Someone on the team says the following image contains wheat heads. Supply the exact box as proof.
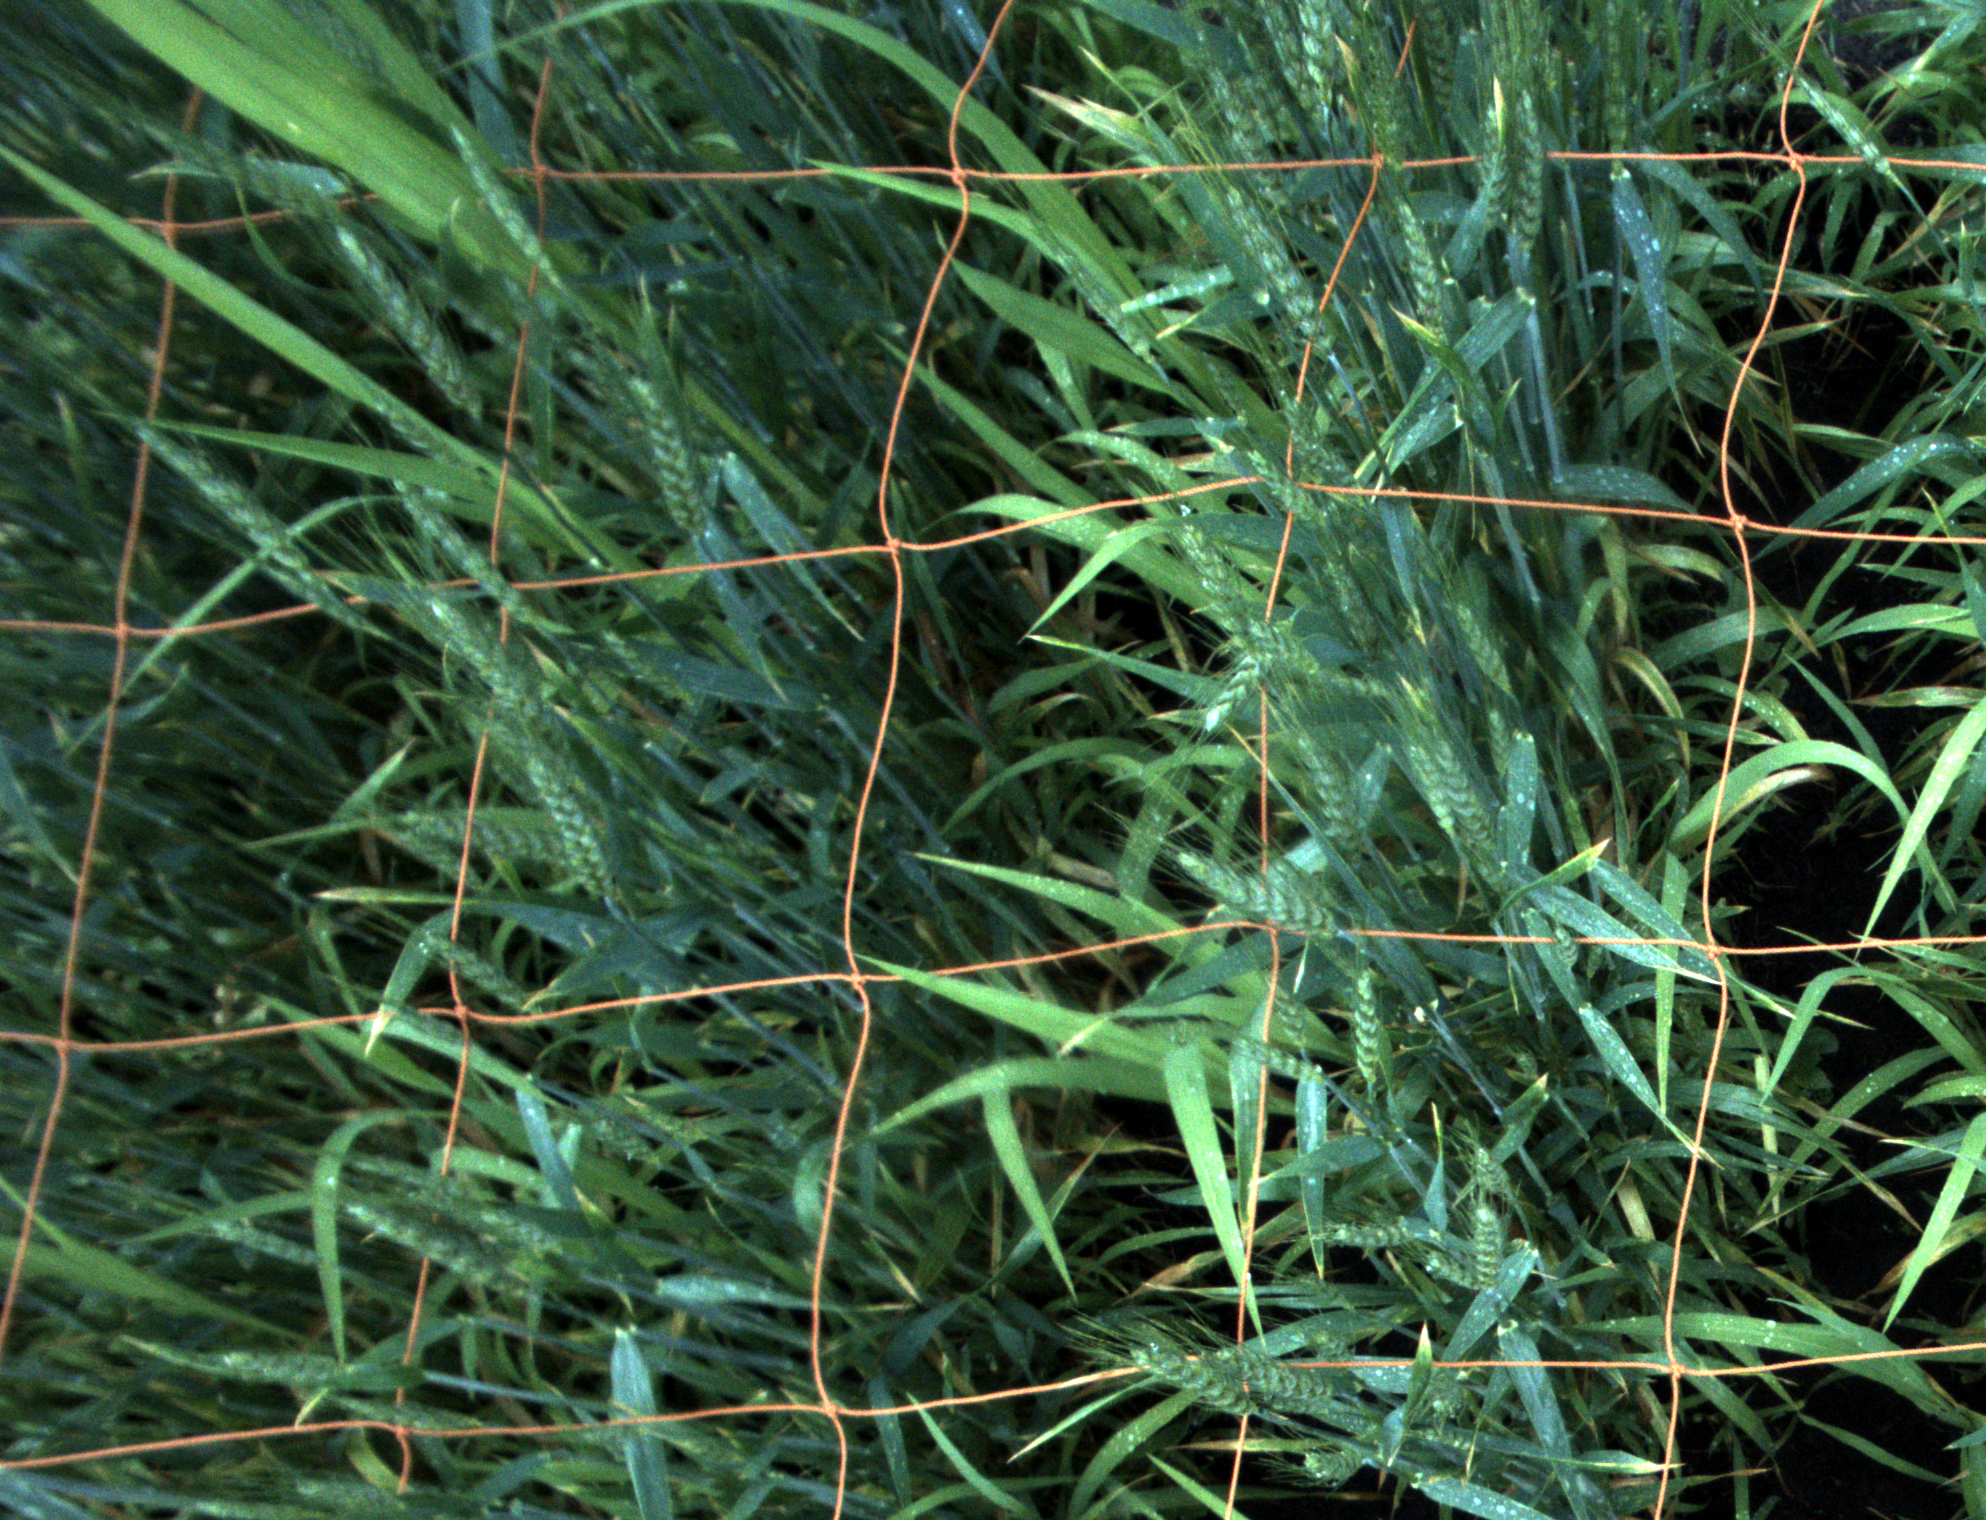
[336,1199,548,1303]
[1322,557,1382,650]
[428,594,526,715]
[572,1423,632,1447]
[586,1116,667,1169]
[1585,943,1603,982]
[654,1274,767,1307]
[505,272,560,339]
[1262,964,1308,1048]
[287,2,392,85]
[1550,919,1579,961]
[366,391,472,470]
[389,477,533,618]
[291,1476,411,1512]
[1247,446,1327,534]
[601,624,699,702]
[1414,1425,1483,1458]
[341,1152,500,1199]
[1419,1245,1481,1292]
[1314,939,1354,979]
[1395,198,1444,329]
[487,762,534,801]
[406,1188,571,1253]
[1196,54,1291,214]
[1356,2,1408,164]
[1050,246,1155,356]
[1465,833,1510,895]
[1213,1345,1341,1396]
[697,832,777,859]
[1600,2,1634,155]
[1522,1,1562,91]
[1559,793,1593,850]
[416,273,545,374]
[401,802,561,870]
[331,223,485,420]
[1259,0,1321,124]
[1413,0,1455,118]
[1473,1210,1505,1292]
[331,1393,484,1430]
[380,997,476,1045]
[218,1350,367,1383]
[1513,1233,1534,1253]
[1326,1217,1416,1249]
[138,120,320,220]
[1269,1394,1330,1424]
[1247,614,1324,677]
[1199,658,1277,728]
[1171,846,1340,940]
[206,1217,327,1266]
[1451,598,1515,696]
[1308,1324,1357,1366]
[1285,1331,1316,1350]
[483,621,575,755]
[1224,182,1338,348]
[1199,351,1247,418]
[1271,859,1346,909]
[187,1496,334,1520]
[1274,388,1328,486]
[678,1437,744,1473]
[1472,1144,1515,1202]
[1230,66,1280,145]
[630,1106,708,1144]
[1515,1047,1540,1079]
[764,1117,800,1152]
[1122,1335,1251,1412]
[1237,1037,1328,1086]
[1420,1362,1459,1404]
[1214,2,1302,144]
[1327,446,1361,500]
[530,758,615,903]
[1437,735,1498,855]
[1472,99,1510,228]
[1423,1386,1467,1429]
[1511,88,1545,248]
[1483,705,1512,771]
[1352,964,1379,1085]
[1290,728,1363,868]
[418,923,551,1020]
[266,568,385,637]
[1155,1020,1216,1046]
[621,373,710,536]
[488,727,580,784]
[1304,1448,1366,1486]
[1405,740,1456,834]
[1798,73,1891,173]
[1326,669,1389,700]
[1301,1,1337,114]
[128,421,322,584]
[391,829,486,896]
[1167,511,1256,648]
[448,114,558,279]
[1328,498,1385,553]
